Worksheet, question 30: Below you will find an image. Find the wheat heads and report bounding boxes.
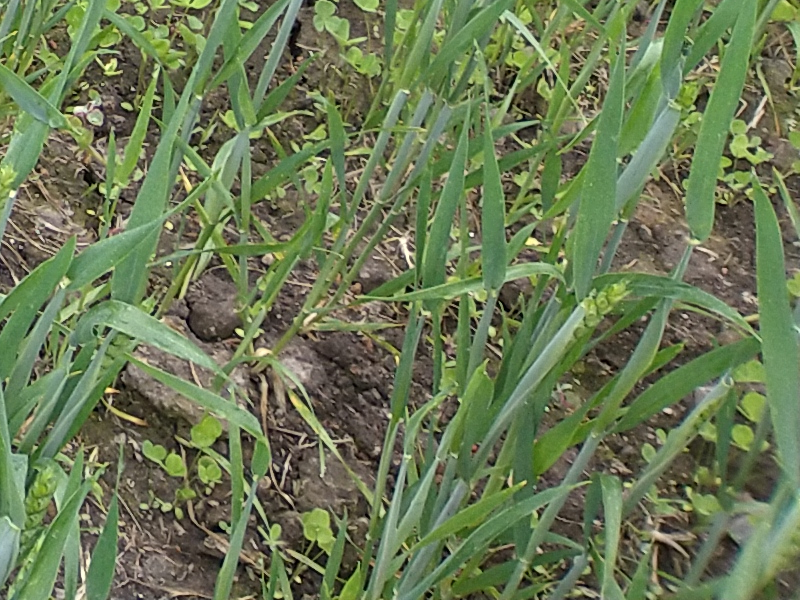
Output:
[17,468,55,570]
[0,167,12,258]
[562,284,625,353]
